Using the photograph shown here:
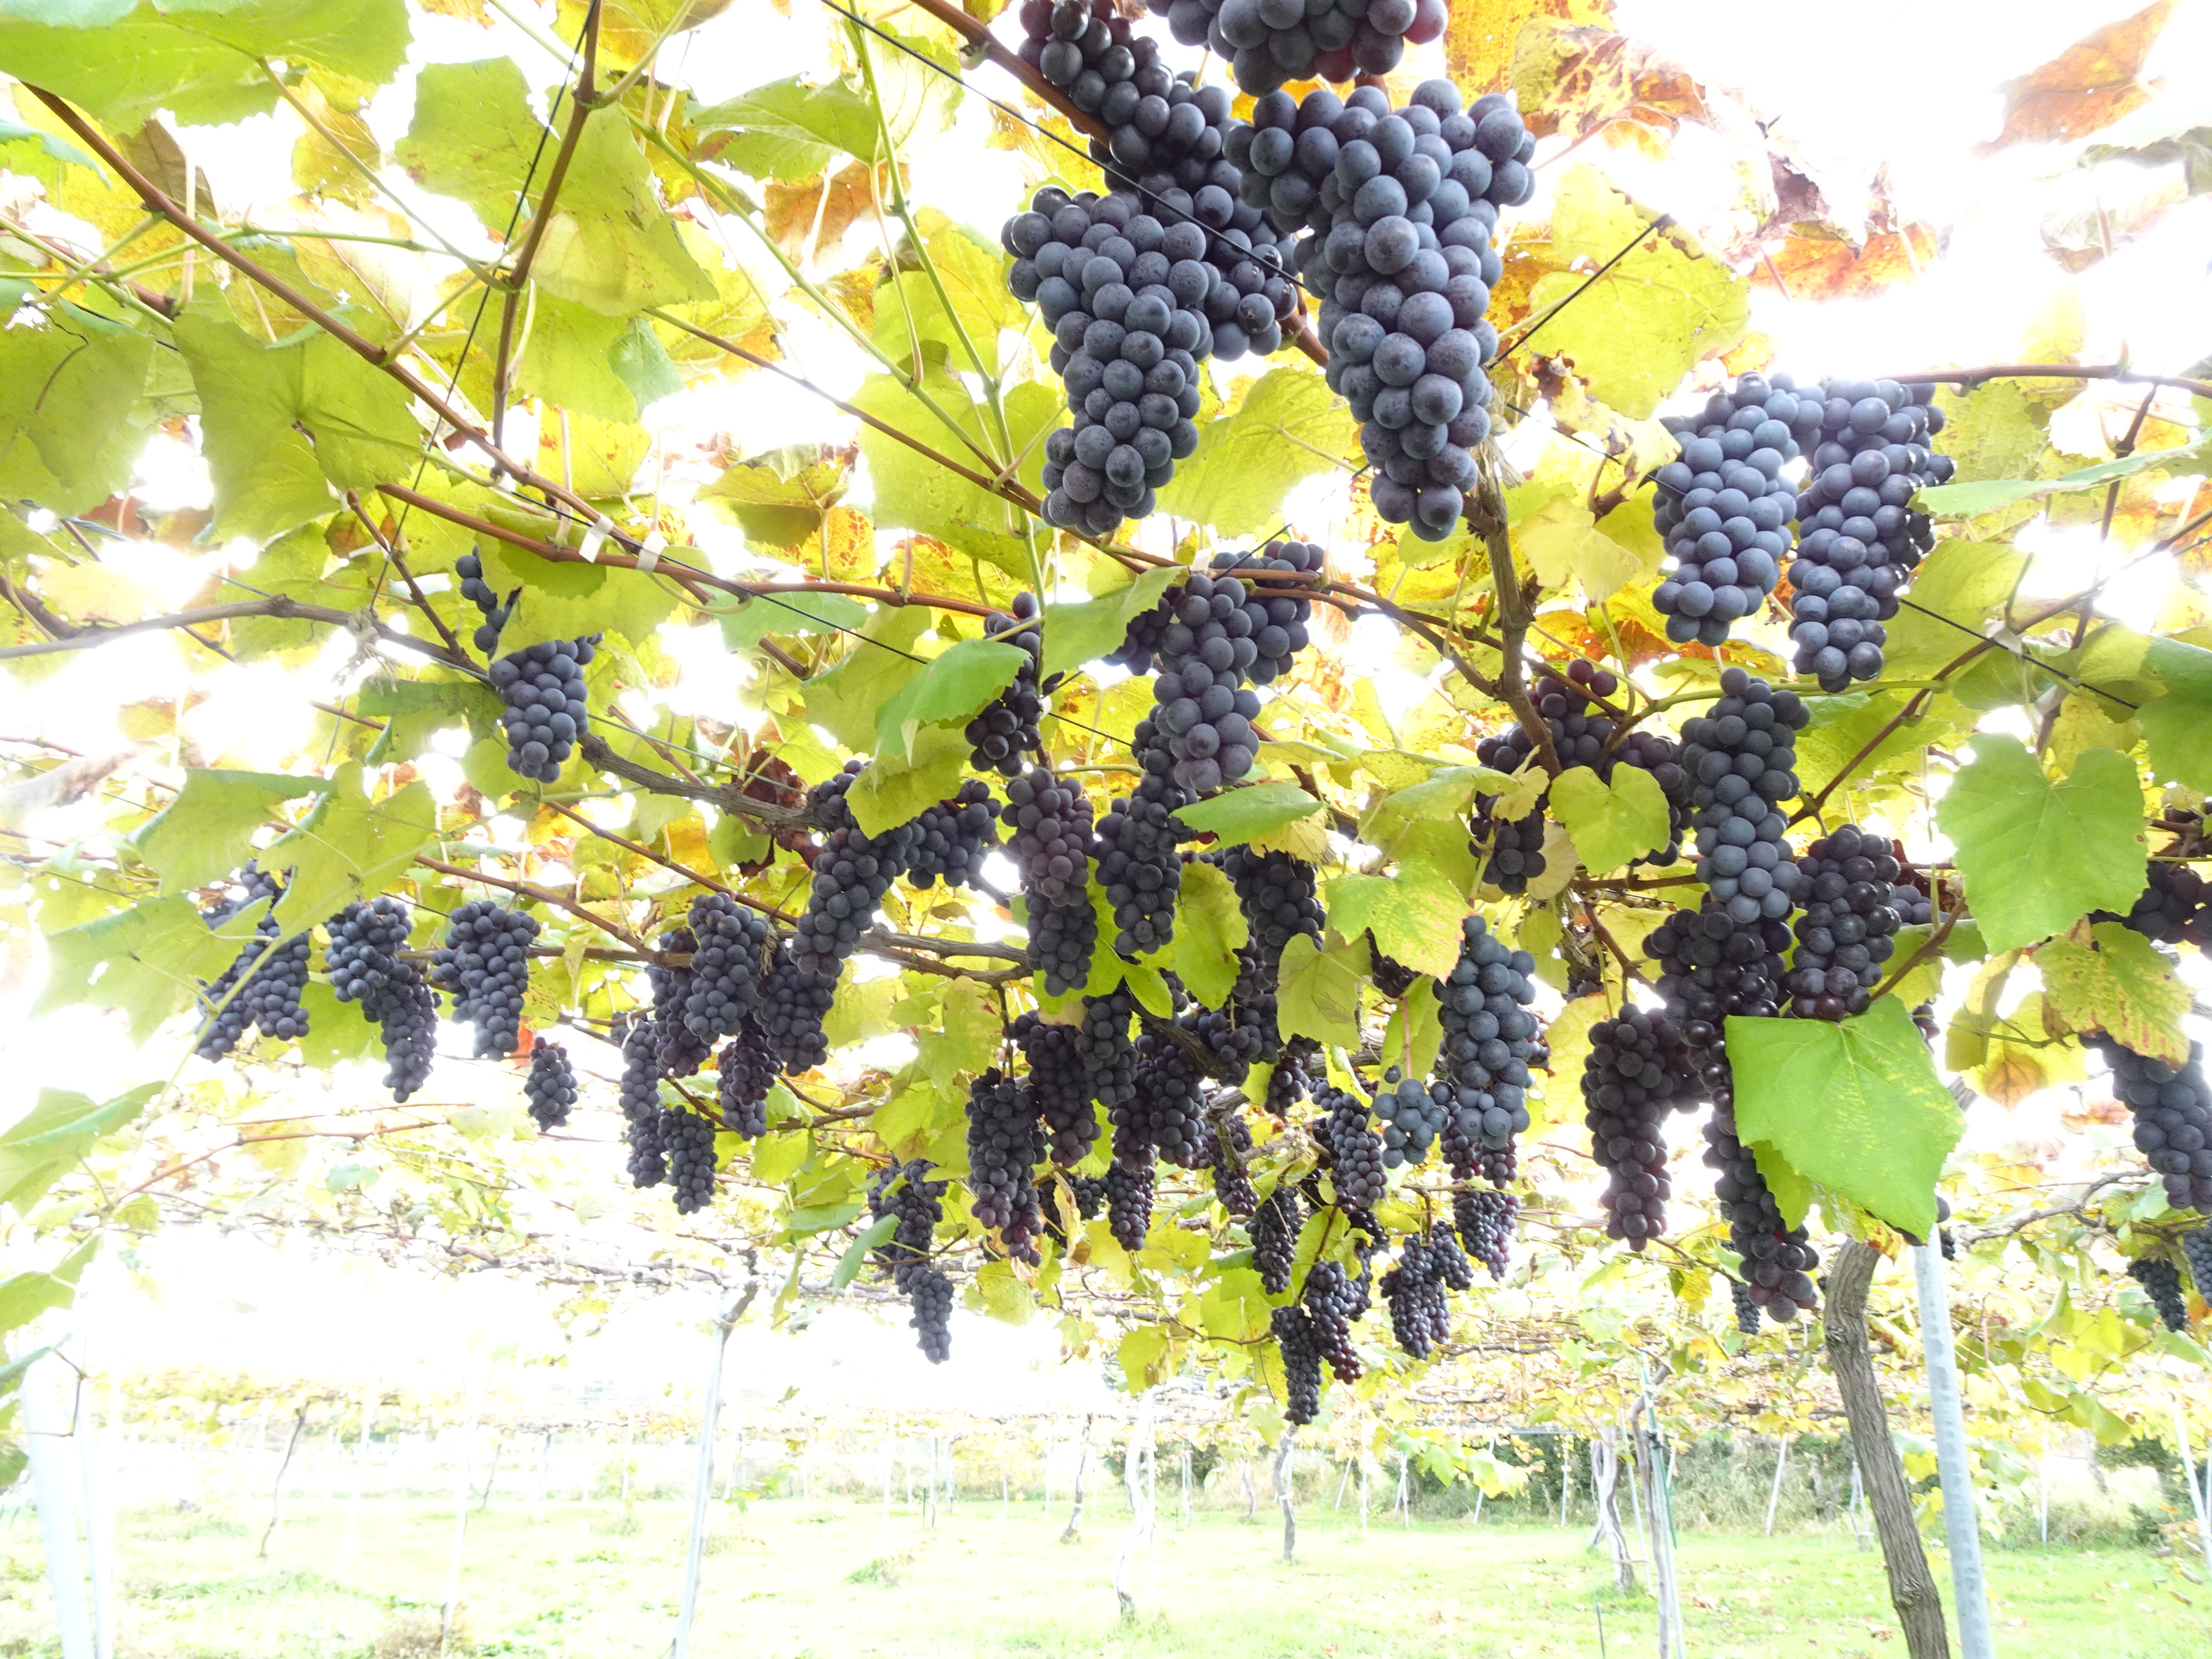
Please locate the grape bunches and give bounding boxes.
[1782,376,1956,694]
[962,589,1041,777]
[1011,764,1097,907]
[2122,1258,2187,1334]
[683,892,768,1048]
[1526,656,1623,777]
[1225,842,1329,990]
[356,955,444,1109]
[1201,1009,1260,1093]
[895,1159,943,1293]
[1786,817,1904,1020]
[904,779,1004,891]
[759,940,839,1080]
[1130,702,1205,813]
[1094,794,1189,957]
[1100,1157,1160,1255]
[1123,976,1192,1034]
[790,821,925,956]
[1429,1216,1475,1287]
[1361,921,1421,1001]
[1732,1274,1766,1343]
[657,1101,722,1215]
[1700,1106,1823,1324]
[1077,992,1143,1112]
[717,1017,774,1142]
[1016,0,1305,230]
[1005,784,1100,1004]
[648,925,714,1080]
[1154,572,1260,788]
[1650,370,1799,648]
[1380,1268,1458,1359]
[222,869,312,1040]
[1400,1230,1432,1287]
[625,1110,667,1195]
[320,898,418,1005]
[1228,940,1287,1068]
[435,898,549,1062]
[904,1254,960,1366]
[1883,886,1962,928]
[1216,79,1536,544]
[1097,607,1171,681]
[1463,1190,1522,1285]
[1001,183,1210,548]
[189,901,244,1063]
[1270,1030,1322,1118]
[1143,0,1455,92]
[1309,1077,1390,1211]
[1617,730,1688,872]
[2090,855,2212,957]
[1160,836,1245,871]
[994,1011,1103,1169]
[1267,1302,1325,1424]
[801,756,871,830]
[1375,1062,1449,1181]
[1212,1112,1258,1220]
[1576,1004,1675,1258]
[1305,1261,1371,1385]
[1431,913,1549,1155]
[1339,1210,1393,1250]
[1467,725,1557,899]
[1561,940,1614,1006]
[457,542,602,788]
[1240,1180,1310,1296]
[528,1037,581,1134]
[962,1062,1049,1226]
[1211,537,1325,686]
[2184,1219,2211,1310]
[1437,1130,1537,1185]
[2079,1027,2210,1221]
[1111,1106,1167,1176]
[607,1005,663,1120]
[1640,902,1790,1023]
[1677,668,1806,924]
[1136,1030,1213,1172]
[1678,1018,1740,1137]
[863,1164,916,1277]
[1201,160,1307,363]
[1002,1175,1043,1270]
[1065,1171,1111,1225]
[1937,1208,1962,1263]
